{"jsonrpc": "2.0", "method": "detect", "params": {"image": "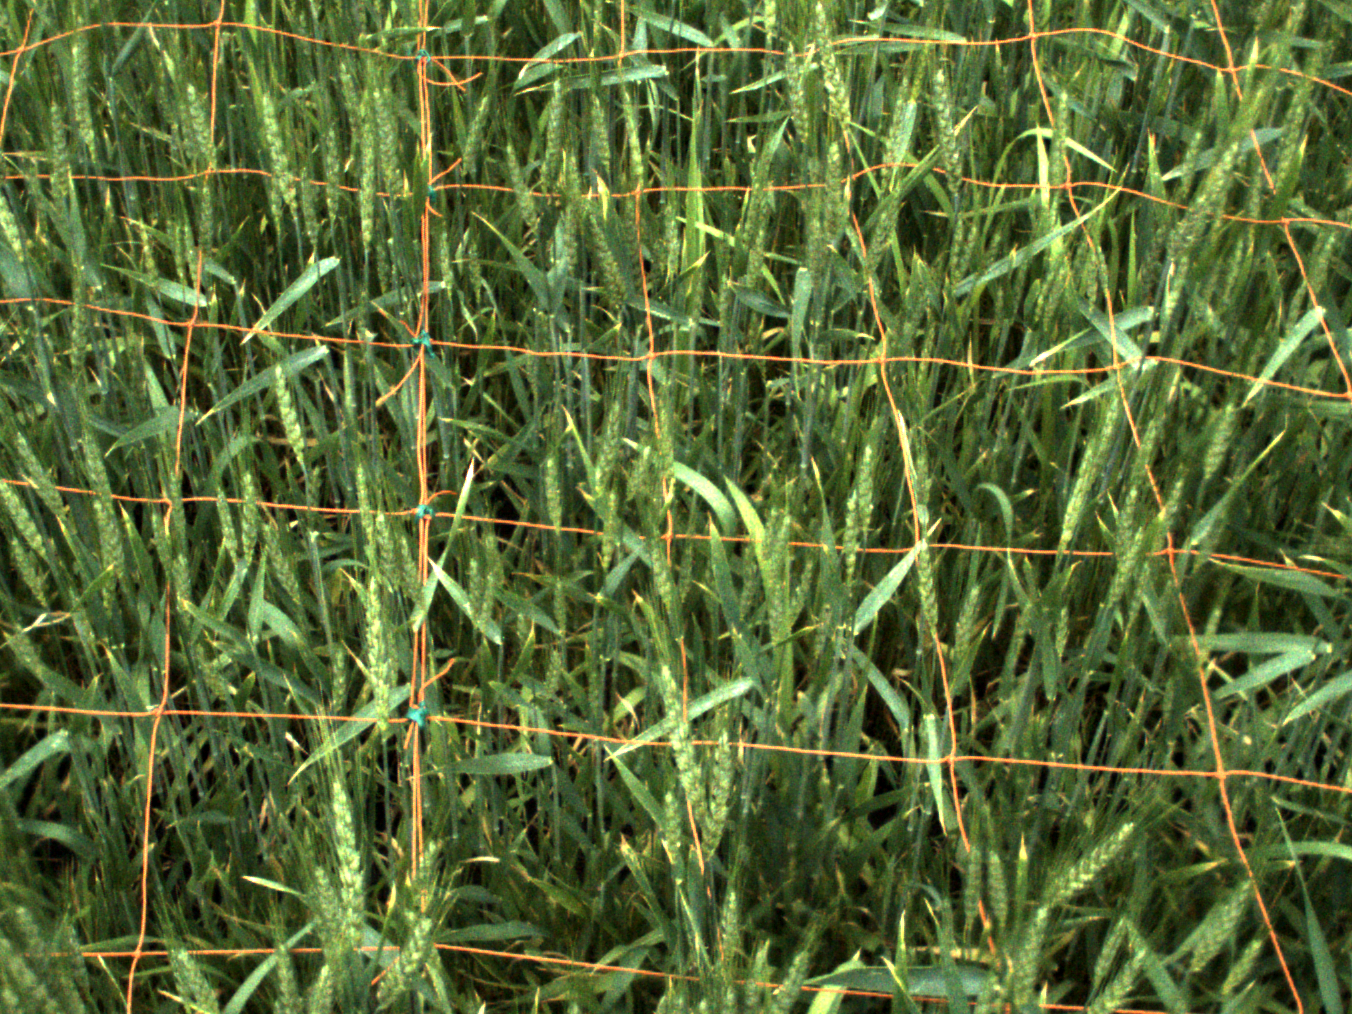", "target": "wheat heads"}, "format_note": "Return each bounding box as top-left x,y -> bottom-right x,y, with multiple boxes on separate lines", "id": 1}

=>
590,91 -> 611,170
942,0 -> 958,16
955,222 -> 978,282
1162,678 -> 1174,725
890,185 -> 900,236
327,650 -> 345,713
338,59 -> 362,132
408,0 -> 420,25
259,524 -> 301,604
749,950 -> 810,1014
562,203 -> 581,276
655,995 -> 685,1014
712,985 -> 736,1014
675,541 -> 693,603
104,503 -> 127,578
751,950 -> 768,980
68,586 -> 95,643
49,98 -> 71,200
844,494 -> 858,577
1059,444 -> 1093,542
69,284 -> 88,372
354,289 -> 369,354
175,944 -> 222,1014
1201,607 -> 1221,649
951,584 -> 982,661
1239,85 -> 1265,141
1255,0 -> 1288,31
314,915 -> 349,1012
1202,261 -> 1224,305
836,198 -> 849,231
880,99 -> 904,198
993,287 -> 1006,328
1219,937 -> 1263,996
1154,578 -> 1171,616
653,542 -> 673,608
1095,393 -> 1120,456
92,497 -> 113,614
1044,821 -> 1133,905
1114,486 -> 1138,560
0,981 -> 31,1014
1011,259 -> 1027,320
14,901 -> 56,976
1128,560 -> 1150,627
858,441 -> 875,528
186,81 -> 220,161
662,788 -> 681,862
380,85 -> 399,143
602,0 -> 632,36
1081,952 -> 1146,1014
540,648 -> 562,690
1202,403 -> 1236,477
166,944 -> 194,1000
786,559 -> 814,628
1181,142 -> 1240,259
372,87 -> 405,197
515,610 -> 527,647
693,276 -> 705,324
325,126 -> 340,215
1032,0 -> 1049,30
767,582 -> 784,634
7,532 -> 48,611
59,925 -> 91,986
15,428 -> 64,515
650,237 -> 666,286
0,160 -> 23,263
198,185 -> 214,258
149,511 -> 170,572
968,971 -> 999,1014
1166,154 -> 1245,254
13,623 -> 40,667
49,959 -> 88,1014
1010,601 -> 1032,655
269,942 -> 303,1014
766,516 -> 793,577
625,445 -> 650,497
168,471 -> 188,540
1010,0 -> 1024,13
1186,878 -> 1252,974
597,492 -> 618,566
904,289 -> 929,334
177,104 -> 201,158
1034,271 -> 1056,320
1164,256 -> 1188,319
865,210 -> 889,274
593,0 -> 604,33
0,0 -> 16,41
1005,903 -> 1049,1009
166,218 -> 175,253
542,311 -> 556,372
697,730 -> 732,857
173,551 -> 190,624
554,572 -> 567,626
910,42 -> 931,100
744,198 -> 770,289
807,154 -> 825,183
787,38 -> 811,142
270,171 -> 283,222
313,860 -> 344,942
374,916 -> 435,1011
763,0 -> 781,38
656,662 -> 708,820
738,978 -> 761,1014
1291,0 -> 1313,25
172,223 -> 184,283
0,477 -> 48,557
1246,166 -> 1262,221
804,218 -> 825,283
331,778 -> 368,948
1096,242 -> 1109,290
974,234 -> 1001,280
484,531 -> 505,587
691,996 -> 711,1014
699,556 -> 720,614
29,156 -> 50,235
587,213 -> 626,310
948,218 -> 965,270
271,995 -> 289,1014
568,154 -> 582,205
462,95 -> 491,171
1221,238 -> 1242,304
915,328 -> 934,391
305,464 -> 321,526
1085,254 -> 1099,316
0,906 -> 68,1014
740,563 -> 759,615
503,141 -> 539,236
467,556 -> 482,614
652,994 -> 667,1014
184,224 -> 199,295
374,511 -> 397,593
653,404 -> 674,483
465,240 -> 483,295
917,538 -> 937,627
985,847 -> 1010,923
941,894 -> 956,939
1106,525 -> 1143,603
1288,278 -> 1308,329
913,452 -> 930,508
478,572 -> 496,623
273,365 -> 305,468
1129,922 -> 1148,952
719,891 -> 741,961
358,118 -> 376,250
960,846 -> 984,921
307,965 -> 333,1014
215,483 -> 238,557
80,429 -> 112,497
1064,48 -> 1080,83
353,460 -> 373,538
1312,41 -> 1335,78
1070,243 -> 1087,286
1094,914 -> 1128,980
661,204 -> 681,270
439,230 -> 456,294
815,0 -> 852,130
364,571 -> 389,732
241,470 -> 258,569
760,508 -> 780,562
1130,417 -> 1158,484
1152,477 -> 1182,527
1044,87 -> 1069,187
1310,235 -> 1338,293
934,65 -> 964,191
399,531 -> 428,609
261,90 -> 299,209
545,74 -> 563,181
373,243 -> 391,293
333,0 -> 344,18
408,837 -> 443,895
158,84 -> 178,126
138,218 -> 161,288
586,667 -> 601,715
131,359 -> 150,410
71,43 -> 99,165
823,141 -> 843,242
1136,219 -> 1169,297
1044,273 -> 1066,333
718,275 -> 728,330
300,165 -> 320,242
1032,712 -> 1047,752
622,197 -> 644,294
592,398 -> 621,497
1157,1001 -> 1187,1014
622,90 -> 645,180
386,629 -> 399,687
195,652 -> 230,703
542,455 -> 565,534
524,347 -> 539,390
740,181 -> 763,250
1056,604 -> 1073,656
812,602 -> 834,660
1275,52 -> 1324,185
